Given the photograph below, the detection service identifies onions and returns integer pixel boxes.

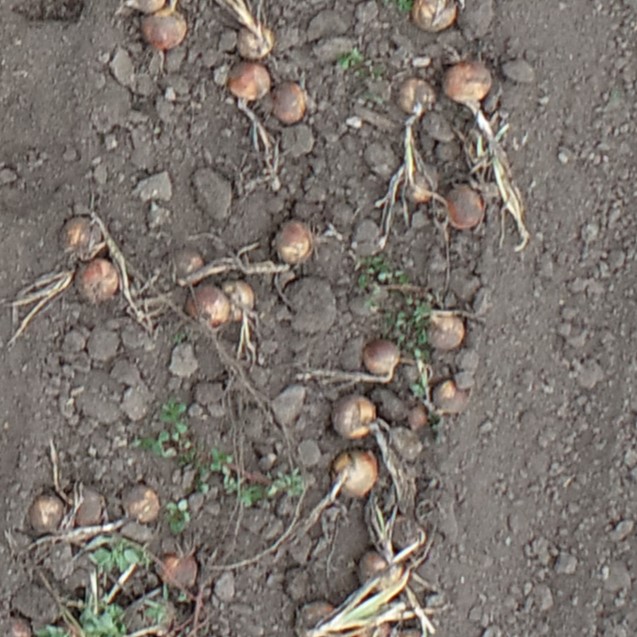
[427,312,462,350]
[328,450,378,497]
[358,620,391,637]
[75,259,117,300]
[172,248,207,287]
[331,393,376,436]
[292,597,337,635]
[392,427,424,462]
[388,513,422,551]
[266,82,308,124]
[63,216,102,259]
[225,280,253,318]
[70,487,104,525]
[442,60,492,104]
[0,615,30,637]
[185,285,229,327]
[356,544,401,591]
[225,62,268,102]
[412,0,456,33]
[405,404,431,431]
[272,222,311,263]
[122,483,159,522]
[139,9,183,50]
[236,26,275,60]
[159,550,196,587]
[361,337,396,375]
[27,492,66,531]
[124,0,163,13]
[389,77,432,115]
[402,173,433,203]
[432,379,465,411]
[439,186,482,230]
